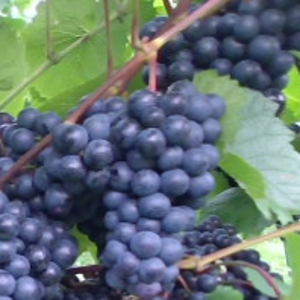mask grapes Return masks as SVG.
<instances>
[{
  "label": "grapes",
  "mask_w": 300,
  "mask_h": 300,
  "mask_svg": "<svg viewBox=\"0 0 300 300\" xmlns=\"http://www.w3.org/2000/svg\"><path fill=\"white\" fill-rule=\"evenodd\" d=\"M68 110L0 113V177L43 138H54L0 185V300H45L79 250L77 230L97 244L102 278L150 300L177 281V231L190 229L216 187L214 145L222 97L189 79L164 92L104 96L77 122Z\"/></svg>",
  "instance_id": "1"
}]
</instances>
